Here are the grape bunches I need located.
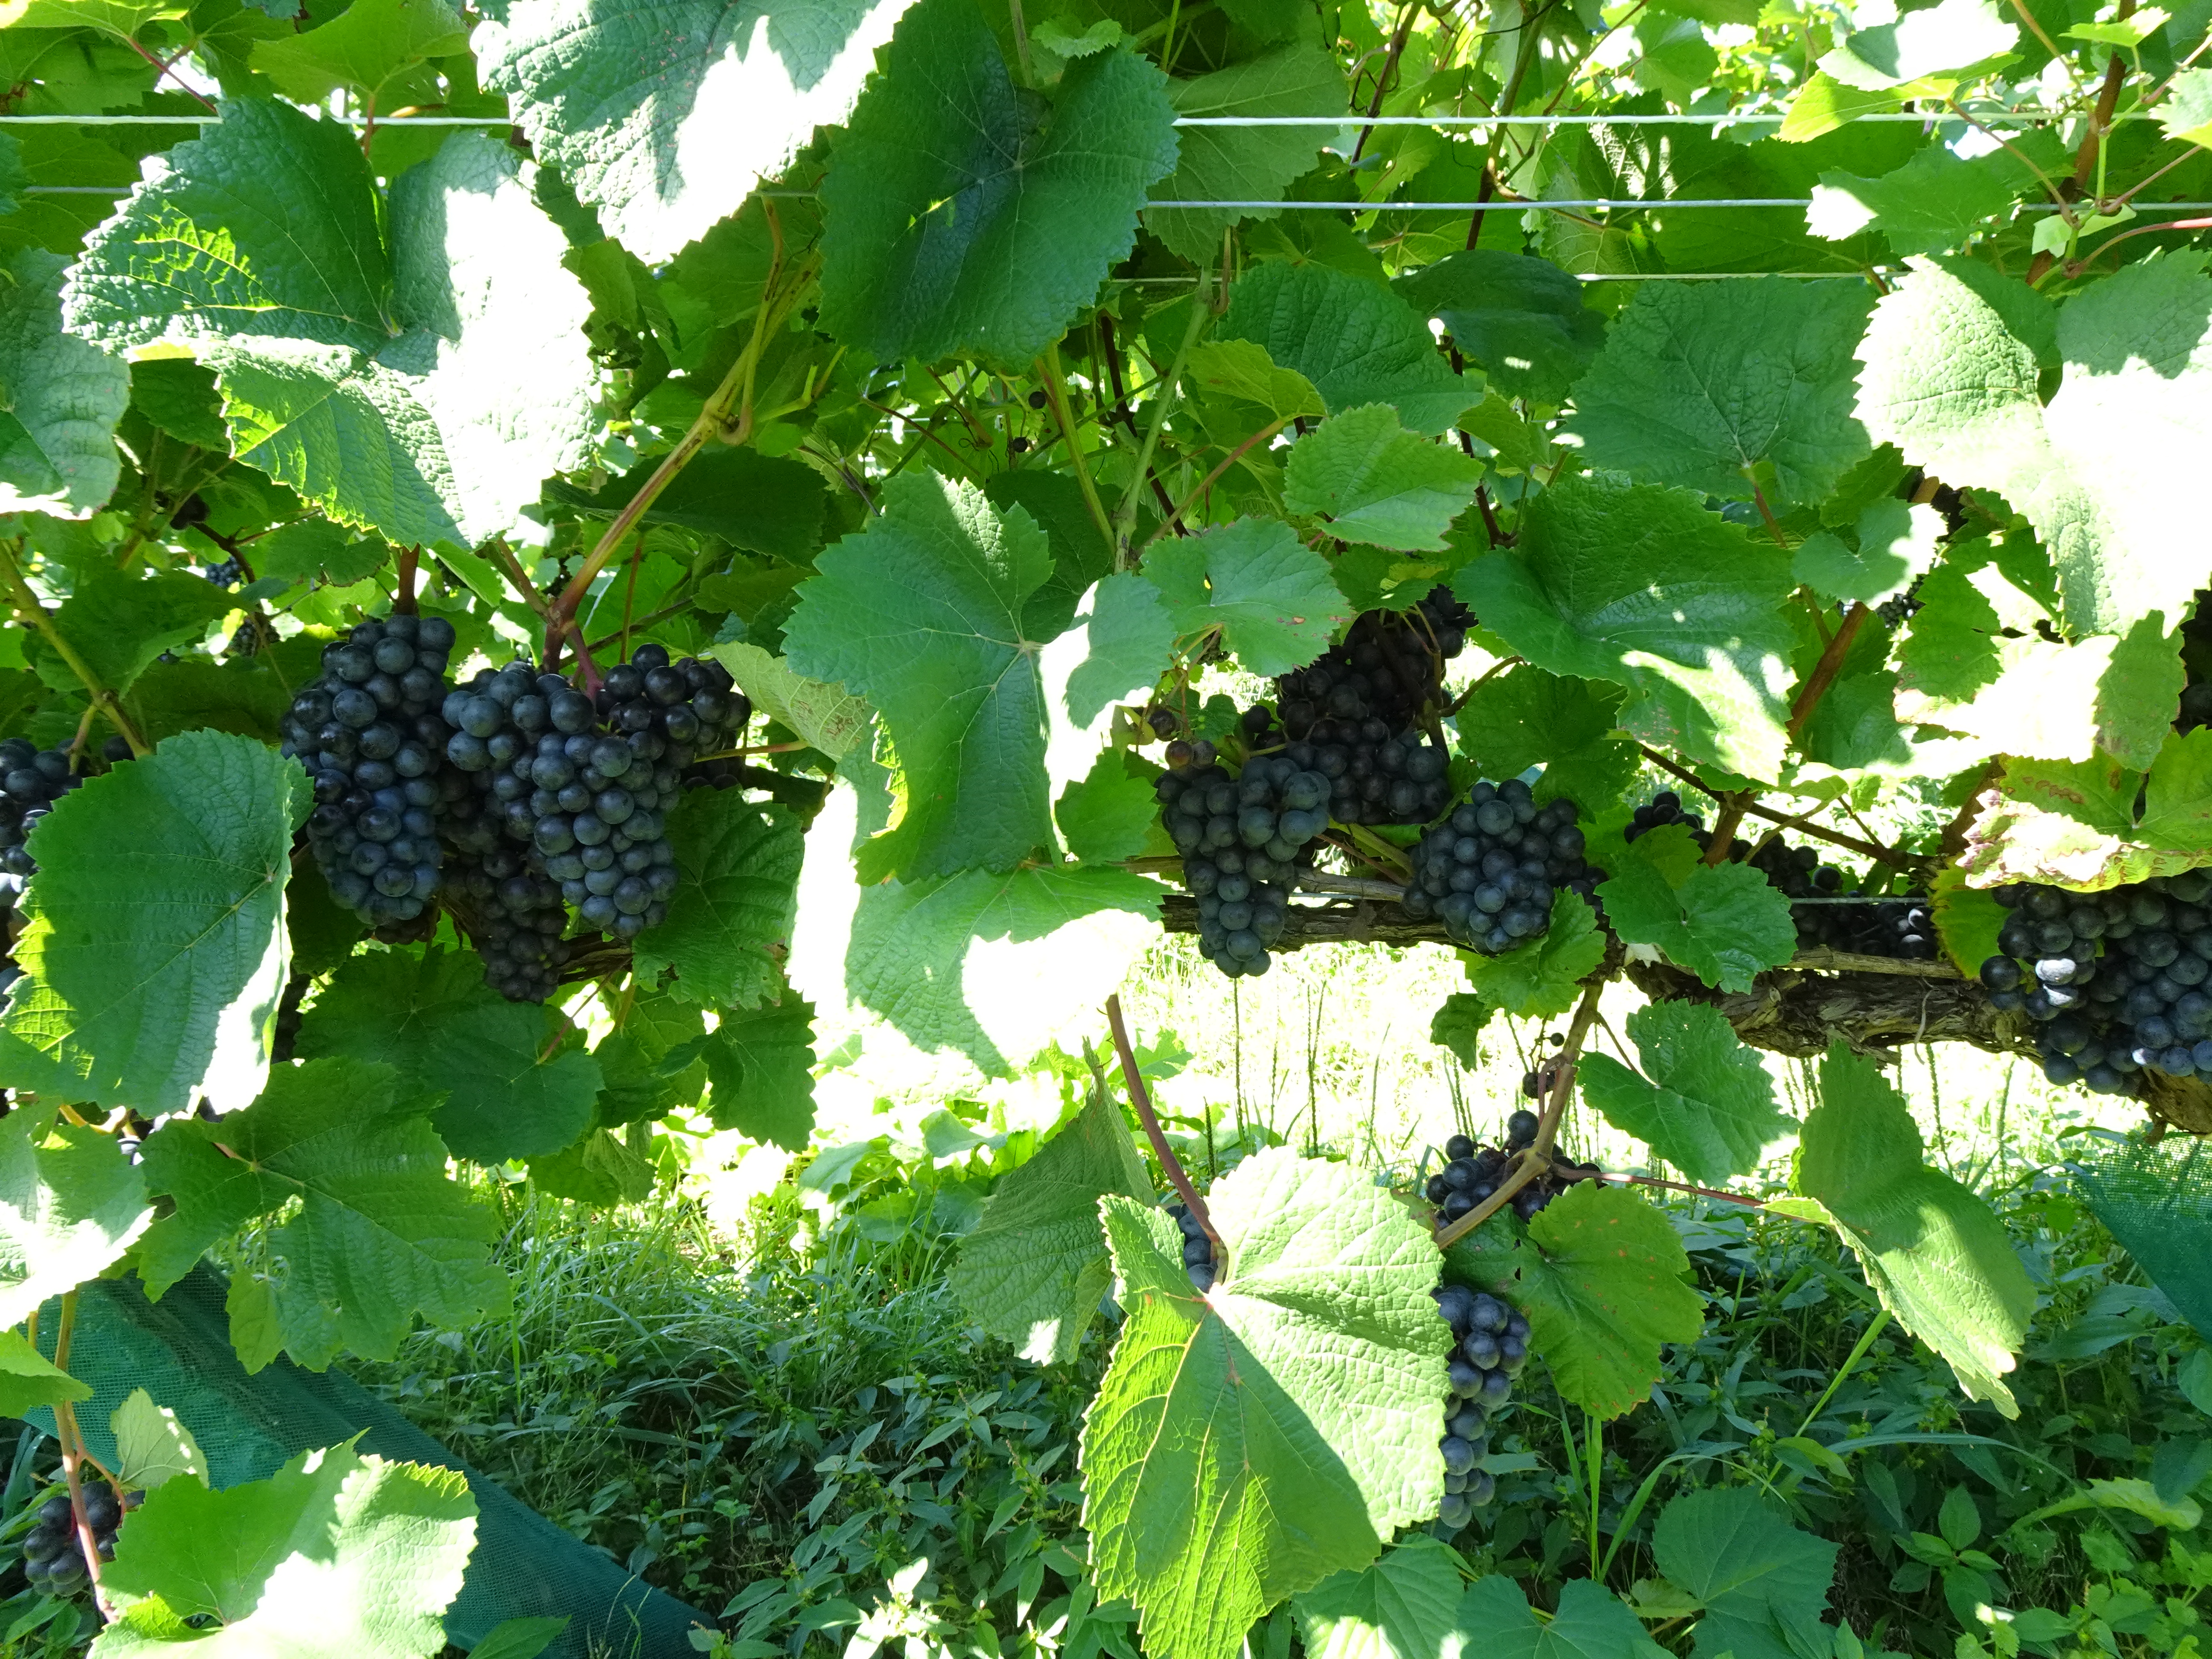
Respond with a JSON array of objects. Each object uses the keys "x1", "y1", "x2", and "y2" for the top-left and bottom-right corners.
[
  {"x1": 1425, "y1": 1110, "x2": 1602, "y2": 1231},
  {"x1": 2171, "y1": 590, "x2": 2212, "y2": 740},
  {"x1": 1624, "y1": 791, "x2": 1715, "y2": 865},
  {"x1": 1165, "y1": 1199, "x2": 1216, "y2": 1293},
  {"x1": 276, "y1": 615, "x2": 456, "y2": 927},
  {"x1": 429, "y1": 760, "x2": 569, "y2": 1005},
  {"x1": 355, "y1": 905, "x2": 441, "y2": 944},
  {"x1": 2133, "y1": 773, "x2": 2150, "y2": 823},
  {"x1": 594, "y1": 643, "x2": 752, "y2": 770},
  {"x1": 441, "y1": 661, "x2": 679, "y2": 940},
  {"x1": 1827, "y1": 883, "x2": 1940, "y2": 961},
  {"x1": 1377, "y1": 728, "x2": 1454, "y2": 825},
  {"x1": 1137, "y1": 703, "x2": 1216, "y2": 768},
  {"x1": 1399, "y1": 778, "x2": 1606, "y2": 957},
  {"x1": 1790, "y1": 870, "x2": 1867, "y2": 956},
  {"x1": 1326, "y1": 585, "x2": 1460, "y2": 701},
  {"x1": 1154, "y1": 757, "x2": 1331, "y2": 977},
  {"x1": 0, "y1": 731, "x2": 129, "y2": 873},
  {"x1": 1243, "y1": 656, "x2": 1393, "y2": 825},
  {"x1": 2036, "y1": 969, "x2": 2143, "y2": 1097},
  {"x1": 677, "y1": 755, "x2": 742, "y2": 794},
  {"x1": 1522, "y1": 1033, "x2": 1564, "y2": 1099},
  {"x1": 2096, "y1": 866, "x2": 2212, "y2": 1076},
  {"x1": 1980, "y1": 881, "x2": 2106, "y2": 1020},
  {"x1": 24, "y1": 1480, "x2": 149, "y2": 1596},
  {"x1": 1428, "y1": 1284, "x2": 1533, "y2": 1528},
  {"x1": 1726, "y1": 830, "x2": 1817, "y2": 919}
]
